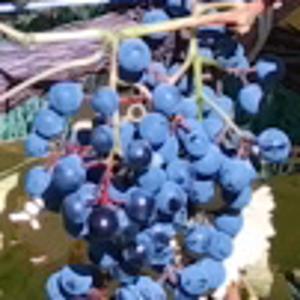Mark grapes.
Segmentation results:
<instances>
[{
  "label": "grapes",
  "mask_w": 300,
  "mask_h": 300,
  "mask_svg": "<svg viewBox=\"0 0 300 300\" xmlns=\"http://www.w3.org/2000/svg\"><path fill=\"white\" fill-rule=\"evenodd\" d=\"M164 8H150L143 14V21L151 23L168 18H186L192 14L191 0H164Z\"/></svg>",
  "instance_id": "6"
},
{
  "label": "grapes",
  "mask_w": 300,
  "mask_h": 300,
  "mask_svg": "<svg viewBox=\"0 0 300 300\" xmlns=\"http://www.w3.org/2000/svg\"><path fill=\"white\" fill-rule=\"evenodd\" d=\"M266 102L267 91L264 85L259 82H247L237 90V104L247 116H262Z\"/></svg>",
  "instance_id": "5"
},
{
  "label": "grapes",
  "mask_w": 300,
  "mask_h": 300,
  "mask_svg": "<svg viewBox=\"0 0 300 300\" xmlns=\"http://www.w3.org/2000/svg\"><path fill=\"white\" fill-rule=\"evenodd\" d=\"M117 65L122 80L152 90V112L138 121L103 86L91 97L94 116L79 115L68 129L84 88L76 79L51 84L24 148L40 156L65 138V153L50 169L28 166L23 192L58 214L66 238L92 244L91 265L120 282L112 300H165L163 284L142 270L178 281L175 300L205 297L227 278L230 238L244 226L258 178L219 139L234 101L181 61L152 62L140 38L118 43Z\"/></svg>",
  "instance_id": "1"
},
{
  "label": "grapes",
  "mask_w": 300,
  "mask_h": 300,
  "mask_svg": "<svg viewBox=\"0 0 300 300\" xmlns=\"http://www.w3.org/2000/svg\"><path fill=\"white\" fill-rule=\"evenodd\" d=\"M283 70V59L278 54L261 55L255 60V76L263 82L277 79Z\"/></svg>",
  "instance_id": "7"
},
{
  "label": "grapes",
  "mask_w": 300,
  "mask_h": 300,
  "mask_svg": "<svg viewBox=\"0 0 300 300\" xmlns=\"http://www.w3.org/2000/svg\"><path fill=\"white\" fill-rule=\"evenodd\" d=\"M92 288L93 274L80 264H59L43 279V291L50 300H73L89 294Z\"/></svg>",
  "instance_id": "3"
},
{
  "label": "grapes",
  "mask_w": 300,
  "mask_h": 300,
  "mask_svg": "<svg viewBox=\"0 0 300 300\" xmlns=\"http://www.w3.org/2000/svg\"><path fill=\"white\" fill-rule=\"evenodd\" d=\"M198 48L202 55L236 69H248L246 45L230 35L223 25L204 26L198 29Z\"/></svg>",
  "instance_id": "2"
},
{
  "label": "grapes",
  "mask_w": 300,
  "mask_h": 300,
  "mask_svg": "<svg viewBox=\"0 0 300 300\" xmlns=\"http://www.w3.org/2000/svg\"><path fill=\"white\" fill-rule=\"evenodd\" d=\"M253 146L260 152L264 162L279 164L287 159L291 150V140L284 131L266 127L257 134Z\"/></svg>",
  "instance_id": "4"
}]
</instances>
